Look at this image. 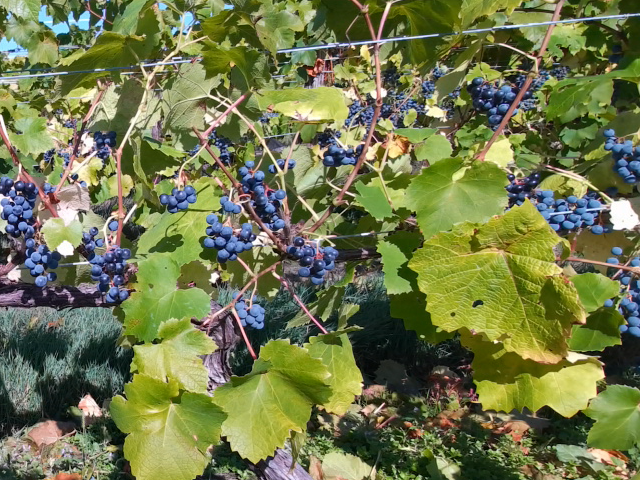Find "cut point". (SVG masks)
Wrapping results in <instances>:
<instances>
[{"instance_id":"cut-point-1","label":"cut point","mask_w":640,"mask_h":480,"mask_svg":"<svg viewBox=\"0 0 640 480\" xmlns=\"http://www.w3.org/2000/svg\"><path fill=\"white\" fill-rule=\"evenodd\" d=\"M374 106H375V103H372V104H369V105H367V106H365V107L361 108L360 110H358V111L354 114V116L352 117L351 122H350V124H349V126H348V128H347V131H350V130H351V128H352V127H353V125H354V121H355V119L360 115V113H362V112H364L365 110H368L369 108L374 107Z\"/></svg>"},{"instance_id":"cut-point-2","label":"cut point","mask_w":640,"mask_h":480,"mask_svg":"<svg viewBox=\"0 0 640 480\" xmlns=\"http://www.w3.org/2000/svg\"><path fill=\"white\" fill-rule=\"evenodd\" d=\"M529 71H525L522 69H509V70H504L503 73L499 76V79H503V77H505L507 74H524V75H528Z\"/></svg>"},{"instance_id":"cut-point-3","label":"cut point","mask_w":640,"mask_h":480,"mask_svg":"<svg viewBox=\"0 0 640 480\" xmlns=\"http://www.w3.org/2000/svg\"><path fill=\"white\" fill-rule=\"evenodd\" d=\"M301 234L315 235V236L319 237V238L316 239V243H319L321 241V239H324L327 243L332 244V240L326 239L324 235L319 234L317 232L301 231Z\"/></svg>"},{"instance_id":"cut-point-4","label":"cut point","mask_w":640,"mask_h":480,"mask_svg":"<svg viewBox=\"0 0 640 480\" xmlns=\"http://www.w3.org/2000/svg\"><path fill=\"white\" fill-rule=\"evenodd\" d=\"M98 106H100V107L103 109V111H104V113H105V115H106V119H107V121H110L109 113H108V111H107V109H106V106H105L102 102H97V104L95 105V108H94V109H93V111L91 112V114H90V116L88 117V119L90 120V119L93 117V115H94V113H95V111H96V109H97V107H98Z\"/></svg>"},{"instance_id":"cut-point-5","label":"cut point","mask_w":640,"mask_h":480,"mask_svg":"<svg viewBox=\"0 0 640 480\" xmlns=\"http://www.w3.org/2000/svg\"><path fill=\"white\" fill-rule=\"evenodd\" d=\"M204 149L203 144L194 152V154L192 155V157L188 158L185 162H183L181 164V167L186 166L188 163H190L191 161H193L195 158L198 157V154L200 151H202Z\"/></svg>"},{"instance_id":"cut-point-6","label":"cut point","mask_w":640,"mask_h":480,"mask_svg":"<svg viewBox=\"0 0 640 480\" xmlns=\"http://www.w3.org/2000/svg\"><path fill=\"white\" fill-rule=\"evenodd\" d=\"M116 217H118V213H116V214H114V215L110 216V217L106 220V222H105V224H104V226H103L104 239H107V232H106V228H107L108 224H109V223H110L114 218H116Z\"/></svg>"},{"instance_id":"cut-point-7","label":"cut point","mask_w":640,"mask_h":480,"mask_svg":"<svg viewBox=\"0 0 640 480\" xmlns=\"http://www.w3.org/2000/svg\"><path fill=\"white\" fill-rule=\"evenodd\" d=\"M42 206H43V202L40 201V204H39V206L37 208V211H36V223H39V213H40V210H41Z\"/></svg>"}]
</instances>
